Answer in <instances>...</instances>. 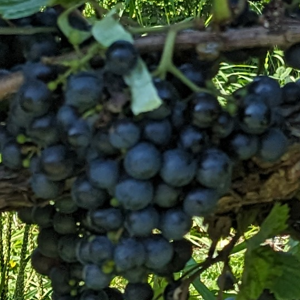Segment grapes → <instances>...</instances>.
I'll use <instances>...</instances> for the list:
<instances>
[{
    "label": "grapes",
    "instance_id": "01657485",
    "mask_svg": "<svg viewBox=\"0 0 300 300\" xmlns=\"http://www.w3.org/2000/svg\"><path fill=\"white\" fill-rule=\"evenodd\" d=\"M136 47L119 40L107 67L82 69L61 94L54 67L35 55L0 137L10 168L30 161L33 221L43 227L33 267L52 300H152L147 273L180 272L193 217L211 213L255 153L277 160L300 135V79L266 75L236 88L222 110L202 90L203 64L183 59L164 80L134 70Z\"/></svg>",
    "mask_w": 300,
    "mask_h": 300
}]
</instances>
